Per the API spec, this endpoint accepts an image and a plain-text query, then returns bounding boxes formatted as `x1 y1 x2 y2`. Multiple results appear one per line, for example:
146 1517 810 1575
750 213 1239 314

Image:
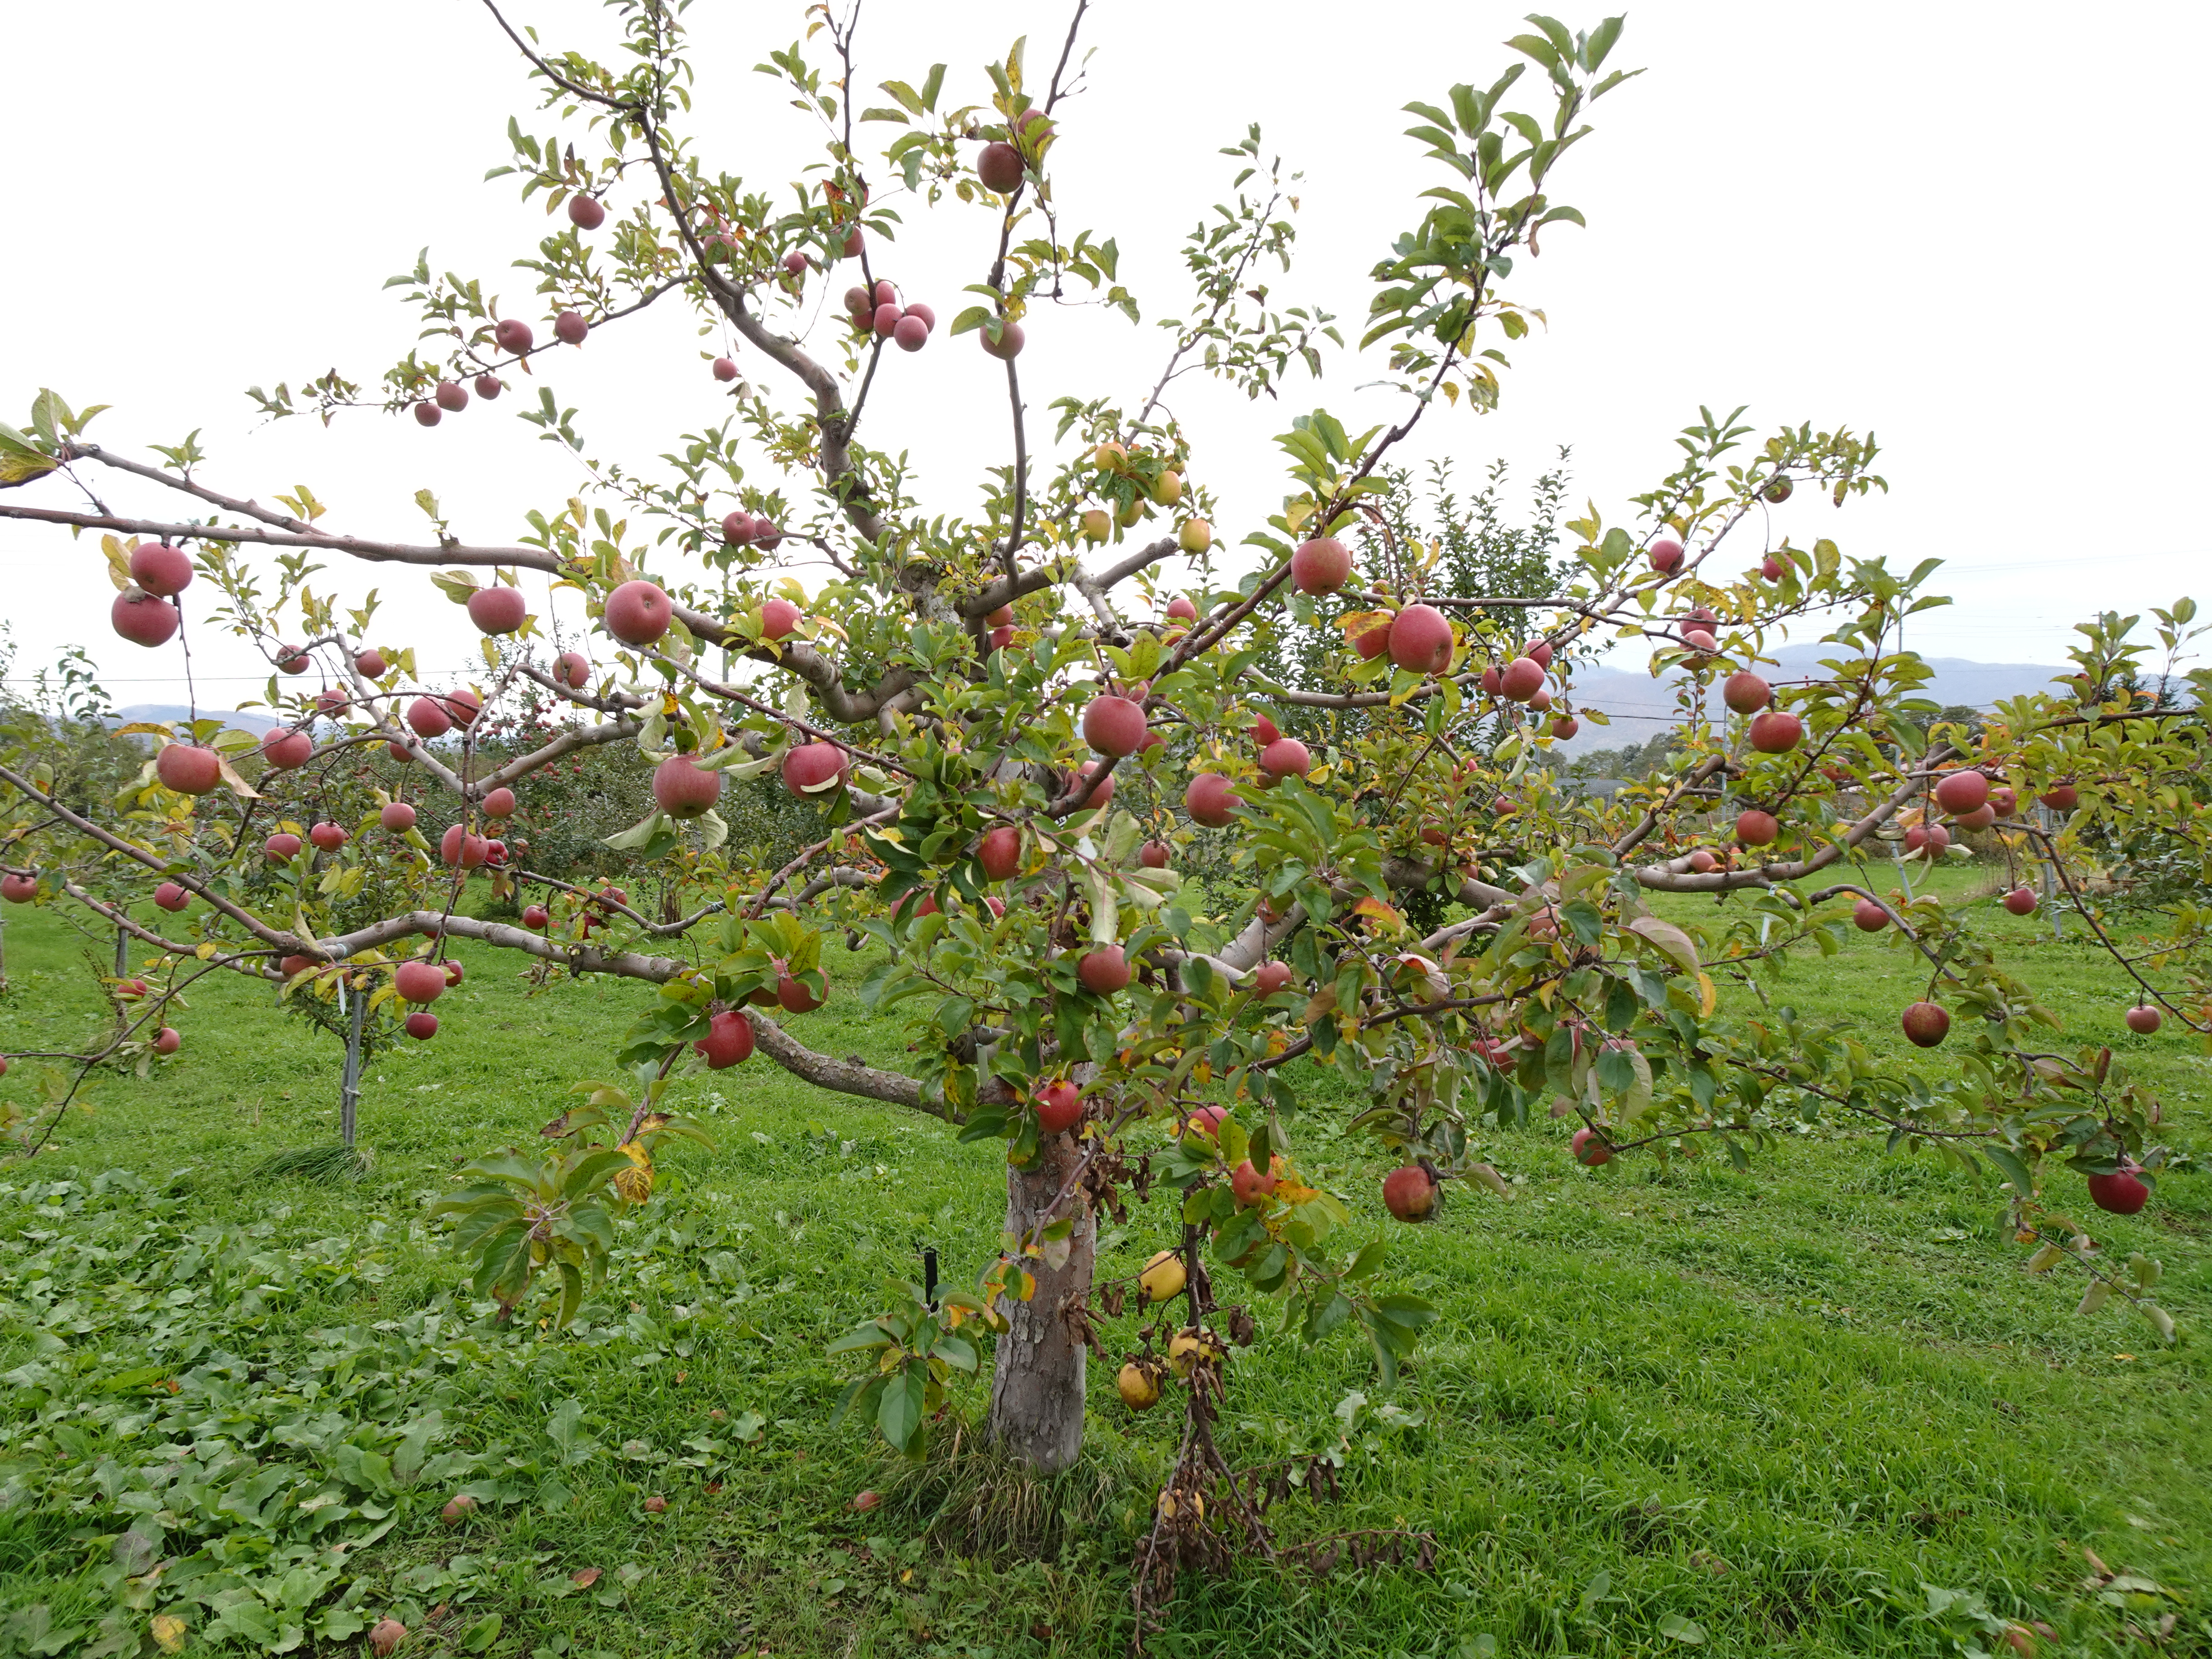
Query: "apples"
475 372 501 401
1020 649 1039 664
570 753 579 764
604 580 671 647
482 786 516 821
1 872 41 905
1116 463 1153 501
100 898 119 915
1179 517 1211 556
1165 597 1197 626
1350 815 1370 835
846 780 866 799
744 951 791 1006
782 740 850 803
712 356 738 383
991 624 1026 657
977 142 1024 194
489 828 506 840
495 319 534 356
1852 894 1892 932
567 192 606 232
276 644 310 676
412 782 417 789
154 881 190 914
802 898 816 910
1011 106 1055 158
1674 629 1717 673
1749 710 1802 755
1354 610 1398 665
1128 924 1147 941
387 848 396 861
319 962 352 989
1185 771 1241 830
1446 755 1479 790
827 224 866 259
2028 1619 2060 1647
972 825 1034 883
523 903 550 931
1170 1326 1220 1375
1448 859 1480 888
1763 473 1794 506
1417 819 1454 850
974 1011 1010 1039
904 301 936 334
1027 1079 1084 1136
356 648 387 678
1336 951 1379 990
1232 1157 1278 1208
851 304 877 336
1259 738 1309 788
1648 539 1684 576
1078 942 1132 997
1679 608 1717 642
580 903 608 930
843 286 871 317
561 715 566 722
1722 670 1770 715
554 311 590 346
435 957 464 988
546 735 555 742
1157 1488 1205 1532
1212 1223 1267 1270
574 766 583 771
484 839 511 869
1149 469 1184 507
155 742 220 797
405 1012 440 1041
1468 1035 1519 1080
980 894 1011 923
494 761 504 771
116 977 148 1003
447 690 482 731
316 690 350 718
534 722 544 730
533 703 541 711
1458 848 1478 868
494 730 503 737
2125 1004 2162 1034
775 962 829 1014
1547 712 1579 740
929 892 965 937
1500 656 1545 704
1760 550 1796 584
130 541 194 595
983 603 1013 628
522 734 531 741
148 1027 182 1056
941 747 978 793
1495 795 1524 819
537 827 544 835
1136 729 1168 758
1517 639 1553 671
190 809 199 817
1159 935 1179 952
1371 579 1391 602
1903 820 1951 861
784 251 810 275
1902 1001 1950 1048
355 774 369 787
110 590 182 646
1529 687 1550 712
1985 787 2022 819
890 768 913 790
1955 799 1996 834
1112 492 1143 530
506 720 515 728
390 733 422 764
1237 1198 1272 1223
875 304 902 339
1360 910 1386 936
701 233 741 266
369 1619 411 1657
435 380 469 413
751 517 784 552
1381 774 1403 799
893 314 928 353
1141 839 1172 871
1773 790 1791 804
529 773 541 781
1599 1038 1644 1076
721 510 758 547
782 905 801 925
552 654 590 689
414 401 441 427
1121 1360 1163 1410
751 598 805 648
1480 664 1514 698
543 806 551 812
1256 897 1285 924
280 952 322 984
311 820 345 852
310 782 317 791
1146 682 1168 706
1736 809 1778 847
1101 679 1151 709
1389 603 1454 674
1816 755 1850 788
265 832 302 865
600 886 628 911
417 787 428 793
517 838 528 849
546 763 554 770
1019 590 1047 614
1381 1166 1440 1224
408 696 451 739
1571 1127 1616 1167
466 587 525 637
1934 770 1989 817
979 317 1026 362
2035 776 2083 812
700 212 730 237
2178 800 2205 826
419 919 446 942
382 802 416 833
1291 537 1351 597
728 901 750 919
521 875 530 884
514 850 525 858
1505 770 1528 792
0 1055 8 1081
255 812 262 820
1689 851 1718 878
1094 440 1130 478
890 885 943 931
874 278 898 307
2002 885 2037 917
1186 1105 1231 1152
1551 1016 1591 1063
2087 1154 2149 1216
508 756 516 764
396 961 446 1005
1077 507 1111 545
478 736 488 746
521 688 528 696
1251 960 1292 1002
1138 1249 1190 1305
1083 694 1148 761
264 727 311 768
1064 759 1116 811
549 697 557 708
1238 764 1278 791
1248 709 1283 747
1529 903 1573 947
441 823 487 872
391 840 398 847
779 272 800 295
652 751 722 820
1157 626 1193 656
